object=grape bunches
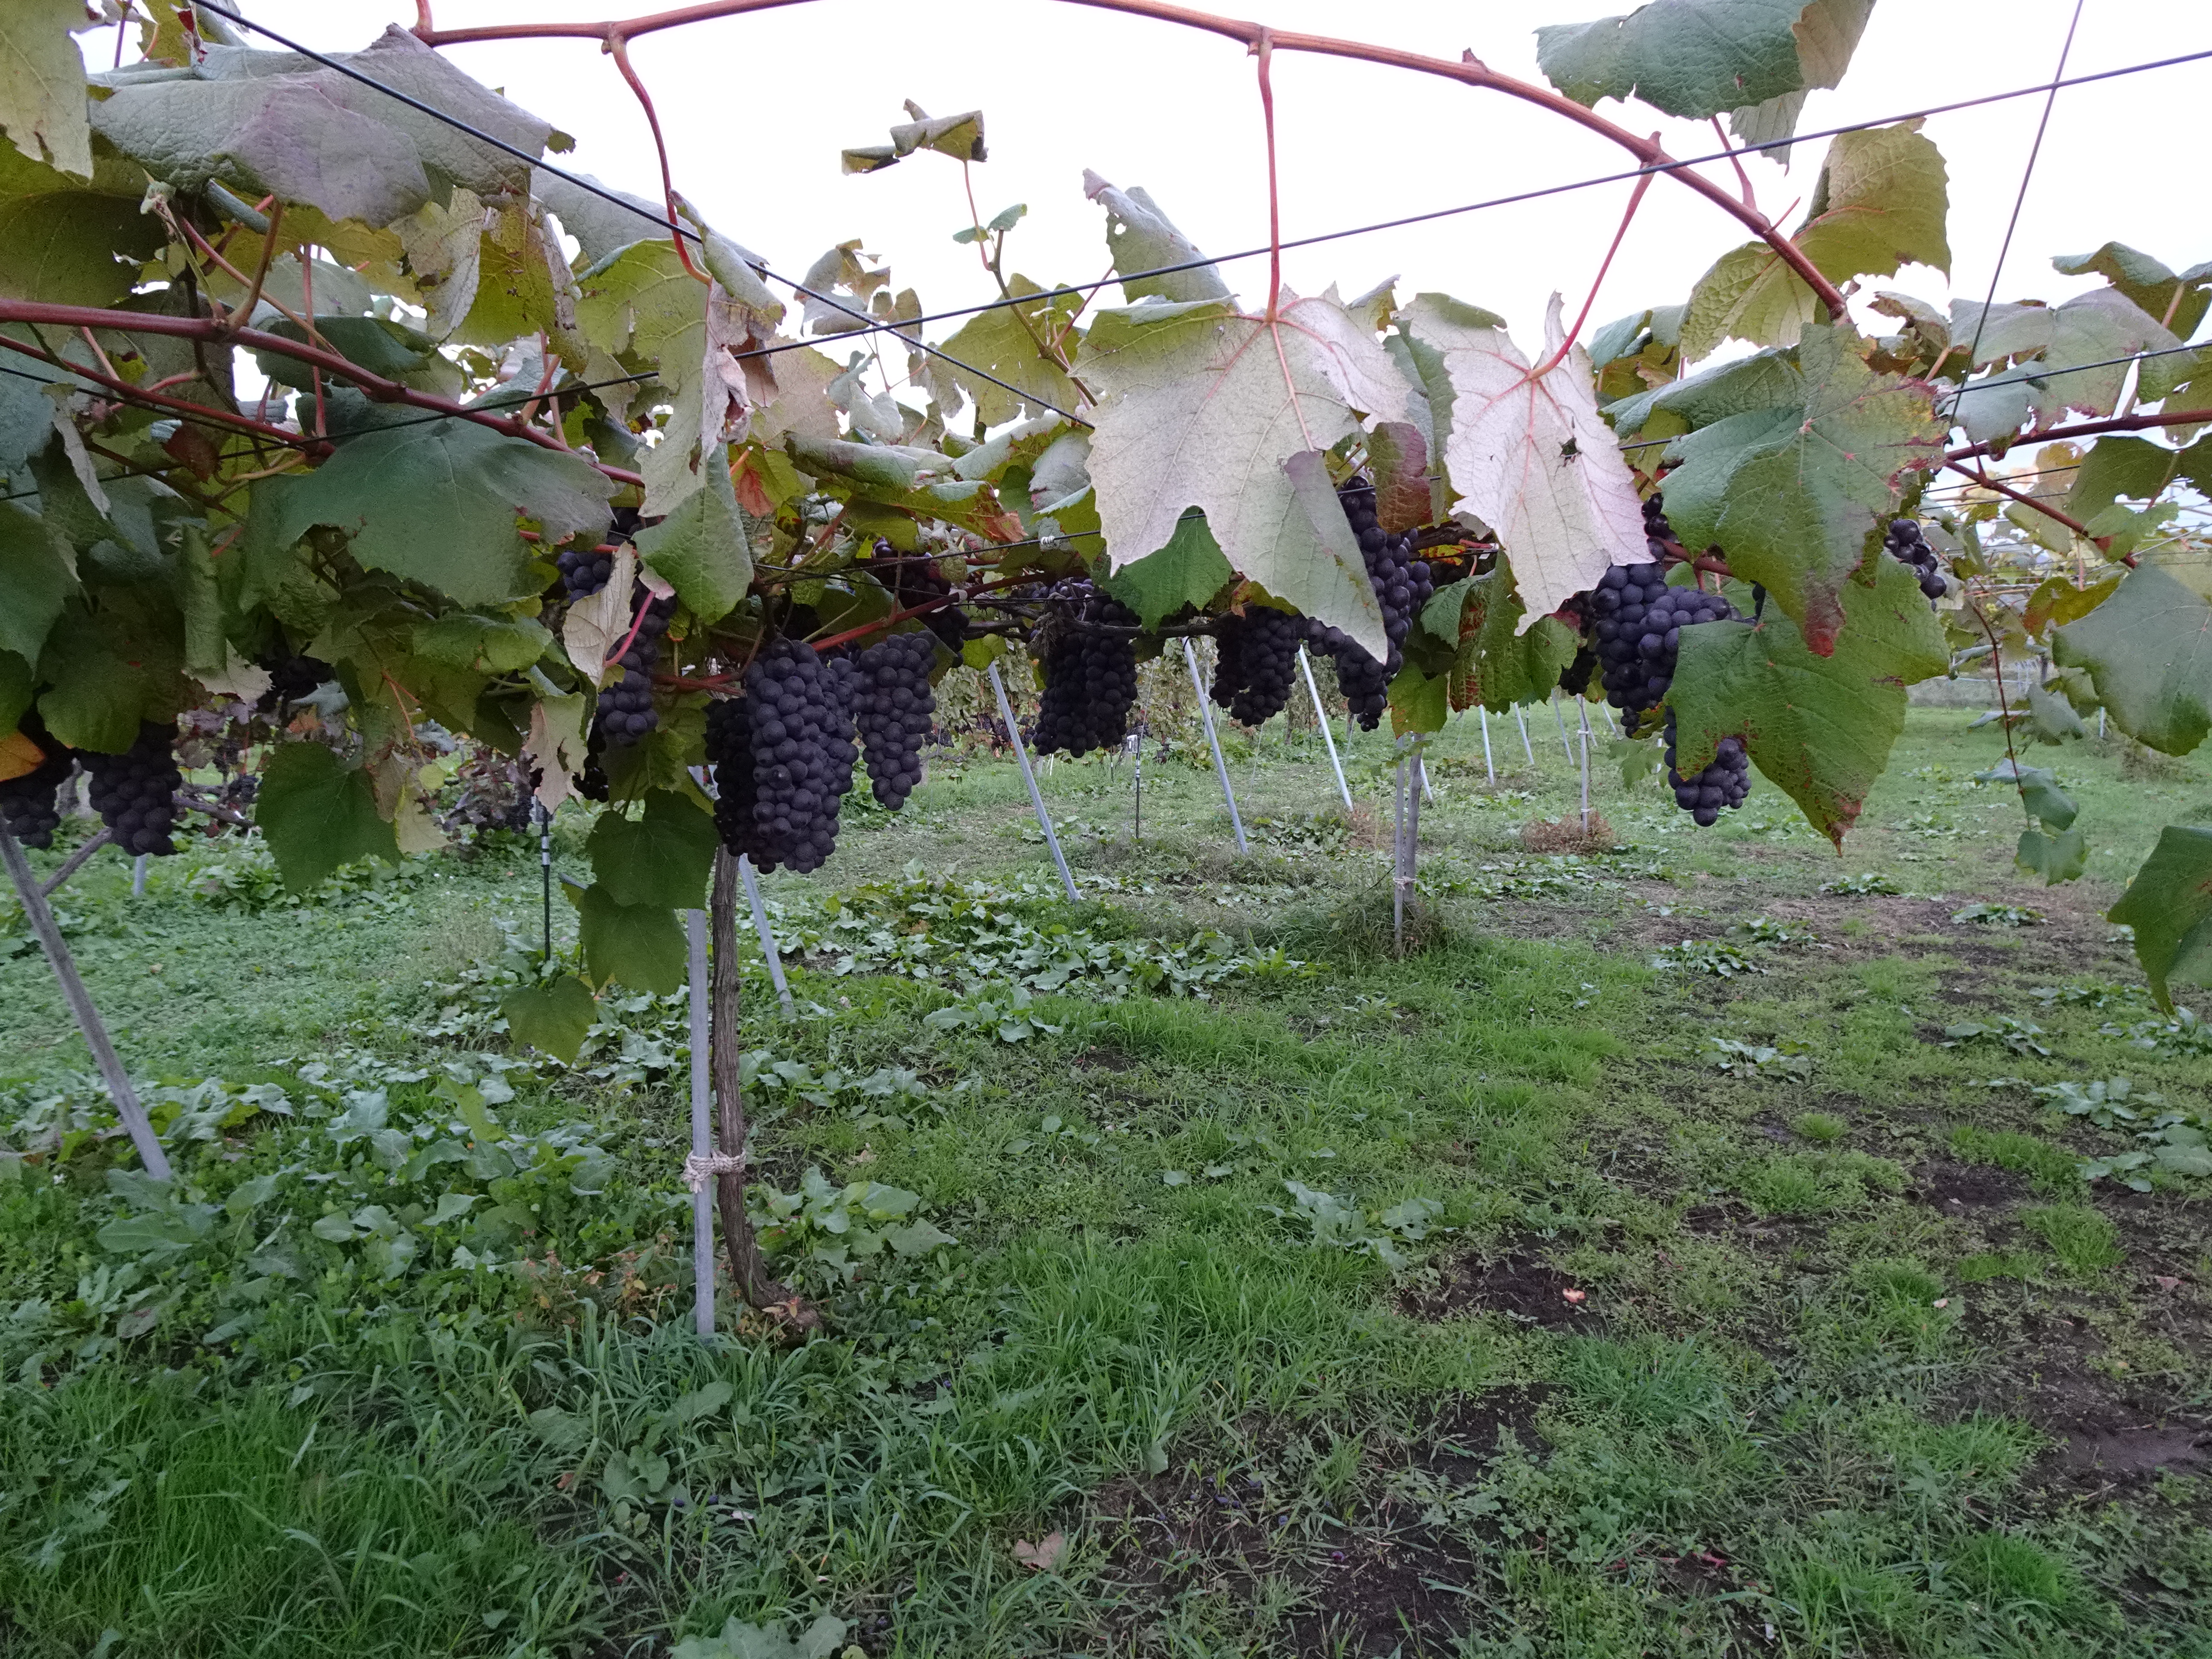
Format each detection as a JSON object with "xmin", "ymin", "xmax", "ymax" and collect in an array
[
  {"xmin": 592, "ymin": 613, "xmax": 667, "ymax": 735},
  {"xmin": 1641, "ymin": 588, "xmax": 1746, "ymax": 702},
  {"xmin": 1663, "ymin": 719, "xmax": 1754, "ymax": 830},
  {"xmin": 3, "ymin": 758, "xmax": 64, "ymax": 853},
  {"xmin": 1553, "ymin": 591, "xmax": 1600, "ymax": 693},
  {"xmin": 526, "ymin": 538, "xmax": 619, "ymax": 630},
  {"xmin": 209, "ymin": 732, "xmax": 249, "ymax": 775},
  {"xmin": 739, "ymin": 636, "xmax": 858, "ymax": 875},
  {"xmin": 1648, "ymin": 490, "xmax": 1690, "ymax": 540},
  {"xmin": 850, "ymin": 627, "xmax": 941, "ymax": 812},
  {"xmin": 566, "ymin": 748, "xmax": 630, "ymax": 808},
  {"xmin": 1394, "ymin": 544, "xmax": 1458, "ymax": 668},
  {"xmin": 1334, "ymin": 474, "xmax": 1411, "ymax": 648},
  {"xmin": 1229, "ymin": 607, "xmax": 1300, "ymax": 729},
  {"xmin": 1881, "ymin": 515, "xmax": 1951, "ymax": 602},
  {"xmin": 926, "ymin": 596, "xmax": 973, "ymax": 671},
  {"xmin": 1079, "ymin": 600, "xmax": 1140, "ymax": 750},
  {"xmin": 88, "ymin": 716, "xmax": 183, "ymax": 860},
  {"xmin": 1310, "ymin": 621, "xmax": 1406, "ymax": 733},
  {"xmin": 705, "ymin": 698, "xmax": 761, "ymax": 860},
  {"xmin": 871, "ymin": 535, "xmax": 937, "ymax": 612},
  {"xmin": 964, "ymin": 568, "xmax": 1033, "ymax": 613},
  {"xmin": 1212, "ymin": 617, "xmax": 1236, "ymax": 710},
  {"xmin": 1026, "ymin": 576, "xmax": 1092, "ymax": 758},
  {"xmin": 1593, "ymin": 542, "xmax": 1665, "ymax": 749}
]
